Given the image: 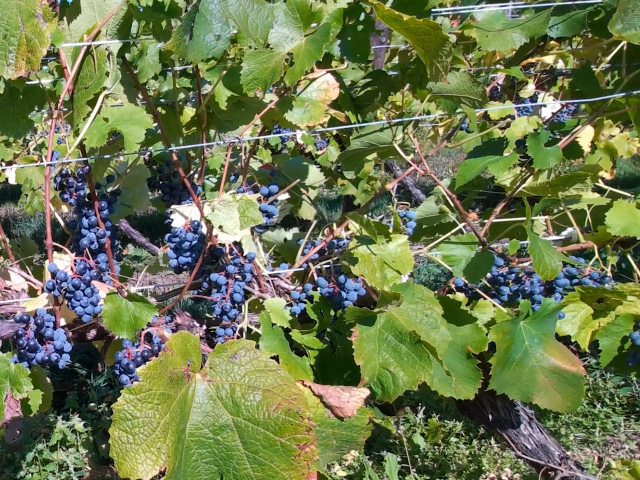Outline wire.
<instances>
[{
	"label": "wire",
	"instance_id": "wire-7",
	"mask_svg": "<svg viewBox=\"0 0 640 480\" xmlns=\"http://www.w3.org/2000/svg\"><path fill=\"white\" fill-rule=\"evenodd\" d=\"M36 299H37L36 295L20 296V297H13V298H3V299H0V304L15 303V302H22V301H33V300H36Z\"/></svg>",
	"mask_w": 640,
	"mask_h": 480
},
{
	"label": "wire",
	"instance_id": "wire-1",
	"mask_svg": "<svg viewBox=\"0 0 640 480\" xmlns=\"http://www.w3.org/2000/svg\"><path fill=\"white\" fill-rule=\"evenodd\" d=\"M302 135H303L302 130L280 133V134H257V135L245 136L240 138L225 139V140L213 141L208 143H200V144H185V145L164 146V147H145V148H139L136 150L123 151V152H118L113 154L80 156V157H75L71 159H63V160L48 161V162H29V163H17V164H11V165H0V170H14V169L31 168V167H51V166H58V165H65V164H73V163L82 162V161L116 159L120 157L138 155V154L147 153V152H166V151H179V150H187V149H202V148H210V147L222 146L227 144L248 142V141L259 140V139H282V138L302 136Z\"/></svg>",
	"mask_w": 640,
	"mask_h": 480
},
{
	"label": "wire",
	"instance_id": "wire-4",
	"mask_svg": "<svg viewBox=\"0 0 640 480\" xmlns=\"http://www.w3.org/2000/svg\"><path fill=\"white\" fill-rule=\"evenodd\" d=\"M445 116H446V113L441 112V113H431V114L422 115V116L406 117L402 119H380V120L366 121V122L352 123V124H335L332 126H327V127L318 128V129H305L304 133L320 134V133H325L329 131H334L337 129H354V128L377 126V125H383V124H405L408 122L425 121L433 118H444Z\"/></svg>",
	"mask_w": 640,
	"mask_h": 480
},
{
	"label": "wire",
	"instance_id": "wire-3",
	"mask_svg": "<svg viewBox=\"0 0 640 480\" xmlns=\"http://www.w3.org/2000/svg\"><path fill=\"white\" fill-rule=\"evenodd\" d=\"M634 94H640V89H632L624 92L604 94V95H600V96L588 98V99H561V100H555V101L526 102V103L507 105V106L476 107L474 109V112L479 113V112H487V111H509V110H517L522 108L536 107V106H557V105H563V104H590V103L600 102L606 99L626 97Z\"/></svg>",
	"mask_w": 640,
	"mask_h": 480
},
{
	"label": "wire",
	"instance_id": "wire-6",
	"mask_svg": "<svg viewBox=\"0 0 640 480\" xmlns=\"http://www.w3.org/2000/svg\"><path fill=\"white\" fill-rule=\"evenodd\" d=\"M188 283H189L188 279L173 280V281H163V282H157V283H153V284L134 285V286L131 287V290L132 291H136V290H142V289H155V288H159V287L184 285V284H188Z\"/></svg>",
	"mask_w": 640,
	"mask_h": 480
},
{
	"label": "wire",
	"instance_id": "wire-2",
	"mask_svg": "<svg viewBox=\"0 0 640 480\" xmlns=\"http://www.w3.org/2000/svg\"><path fill=\"white\" fill-rule=\"evenodd\" d=\"M602 0H577V1H555L539 2L532 4L531 0H501L482 4H467L455 6H442L430 9V17H446L458 13H485L501 10H535L542 7L557 6H579L590 3H601Z\"/></svg>",
	"mask_w": 640,
	"mask_h": 480
},
{
	"label": "wire",
	"instance_id": "wire-5",
	"mask_svg": "<svg viewBox=\"0 0 640 480\" xmlns=\"http://www.w3.org/2000/svg\"><path fill=\"white\" fill-rule=\"evenodd\" d=\"M155 37L135 38V39H107L93 42H61V47H95L109 44H138L155 42Z\"/></svg>",
	"mask_w": 640,
	"mask_h": 480
},
{
	"label": "wire",
	"instance_id": "wire-8",
	"mask_svg": "<svg viewBox=\"0 0 640 480\" xmlns=\"http://www.w3.org/2000/svg\"><path fill=\"white\" fill-rule=\"evenodd\" d=\"M292 271H293L292 267H282V268H278V269H275V270L264 271V272L261 273V276L262 277H266V276H269V275H277V274H281V273H284V272H292Z\"/></svg>",
	"mask_w": 640,
	"mask_h": 480
}]
</instances>
